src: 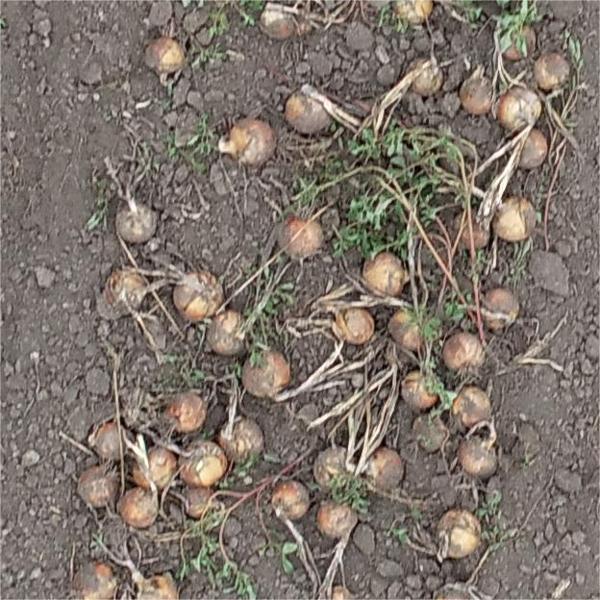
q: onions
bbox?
[117,486,157,526]
[332,308,373,343]
[458,73,495,115]
[221,116,272,164]
[91,419,135,460]
[321,584,354,600]
[206,312,246,356]
[531,51,567,88]
[315,500,354,537]
[241,347,289,394]
[409,58,443,95]
[179,487,211,518]
[499,29,535,59]
[174,269,220,317]
[436,510,480,557]
[361,251,404,295]
[449,384,489,427]
[314,444,352,485]
[494,87,540,128]
[452,207,491,249]
[411,415,446,453]
[219,417,263,461]
[479,285,515,326]
[116,200,156,241]
[137,446,177,487]
[146,37,182,72]
[284,86,330,132]
[389,311,425,351]
[79,465,117,506]
[269,479,308,520]
[274,214,321,258]
[363,446,400,489]
[103,268,145,311]
[440,333,485,373]
[182,445,227,486]
[258,6,299,39]
[136,571,178,599]
[402,373,437,410]
[457,437,495,475]
[432,586,477,600]
[167,390,206,432]
[71,559,127,598]
[491,199,531,241]
[398,0,434,25]
[516,128,548,167]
